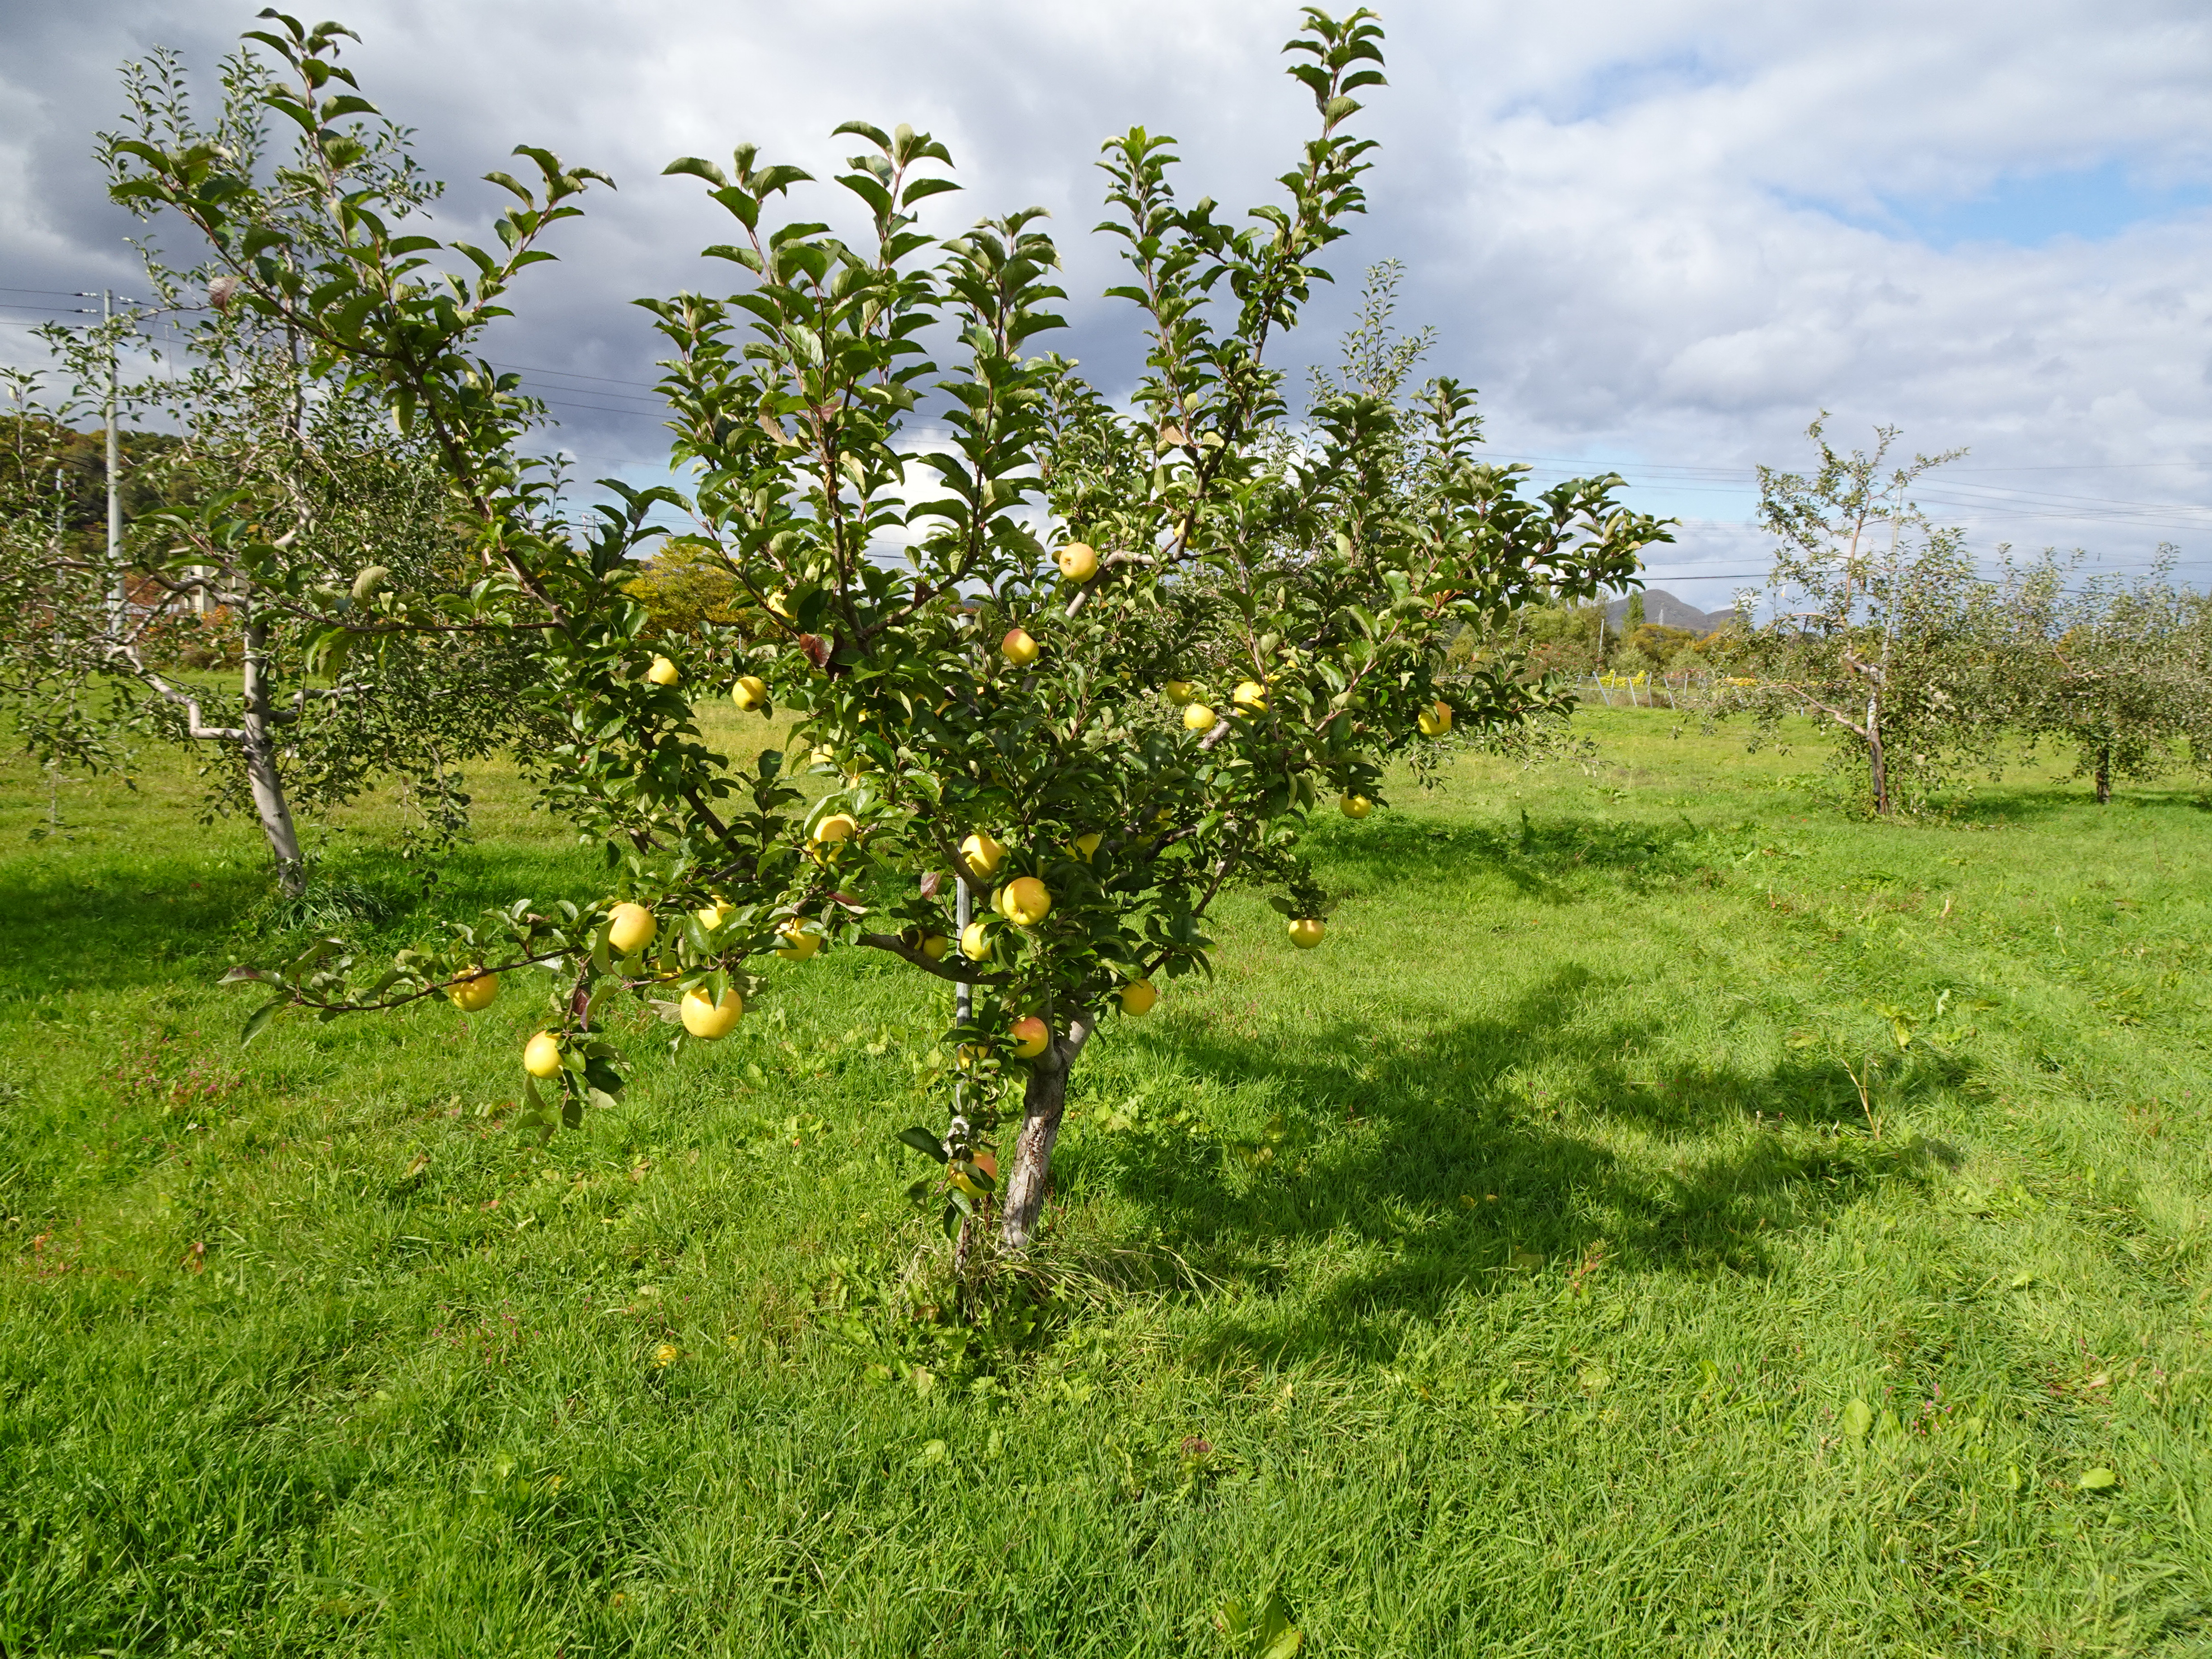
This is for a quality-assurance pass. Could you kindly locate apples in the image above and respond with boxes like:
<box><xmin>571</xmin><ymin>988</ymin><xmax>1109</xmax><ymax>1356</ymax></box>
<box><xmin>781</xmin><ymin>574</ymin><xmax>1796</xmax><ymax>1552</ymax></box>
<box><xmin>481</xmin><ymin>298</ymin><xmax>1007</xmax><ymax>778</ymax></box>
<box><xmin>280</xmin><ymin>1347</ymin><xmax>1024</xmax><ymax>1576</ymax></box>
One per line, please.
<box><xmin>1288</xmin><ymin>919</ymin><xmax>1325</xmax><ymax>949</ymax></box>
<box><xmin>778</xmin><ymin>916</ymin><xmax>821</xmax><ymax>962</ymax></box>
<box><xmin>1166</xmin><ymin>677</ymin><xmax>1195</xmax><ymax>706</ymax></box>
<box><xmin>1418</xmin><ymin>701</ymin><xmax>1451</xmax><ymax>736</ymax></box>
<box><xmin>933</xmin><ymin>699</ymin><xmax>952</xmax><ymax>718</ymax></box>
<box><xmin>948</xmin><ymin>1149</ymin><xmax>997</xmax><ymax>1199</ymax></box>
<box><xmin>1150</xmin><ymin>806</ymin><xmax>1171</xmax><ymax>831</ymax></box>
<box><xmin>608</xmin><ymin>903</ymin><xmax>657</xmax><ymax>955</ymax></box>
<box><xmin>1001</xmin><ymin>628</ymin><xmax>1039</xmax><ymax>666</ymax></box>
<box><xmin>961</xmin><ymin>835</ymin><xmax>1007</xmax><ymax>879</ymax></box>
<box><xmin>1265</xmin><ymin>673</ymin><xmax>1280</xmax><ymax>686</ymax></box>
<box><xmin>1340</xmin><ymin>791</ymin><xmax>1371</xmax><ymax>819</ymax></box>
<box><xmin>957</xmin><ymin>1043</ymin><xmax>991</xmax><ymax>1070</ymax></box>
<box><xmin>805</xmin><ymin>816</ymin><xmax>855</xmax><ymax>867</ymax></box>
<box><xmin>991</xmin><ymin>887</ymin><xmax>1010</xmax><ymax>919</ymax></box>
<box><xmin>448</xmin><ymin>963</ymin><xmax>498</xmax><ymax>1012</ymax></box>
<box><xmin>1174</xmin><ymin>518</ymin><xmax>1202</xmax><ymax>548</ymax></box>
<box><xmin>1234</xmin><ymin>681</ymin><xmax>1269</xmax><ymax>716</ymax></box>
<box><xmin>649</xmin><ymin>658</ymin><xmax>679</xmax><ymax>687</ymax></box>
<box><xmin>1009</xmin><ymin>1016</ymin><xmax>1048</xmax><ymax>1058</ymax></box>
<box><xmin>915</xmin><ymin>693</ymin><xmax>925</xmax><ymax>702</ymax></box>
<box><xmin>849</xmin><ymin>770</ymin><xmax>876</xmax><ymax>789</ymax></box>
<box><xmin>654</xmin><ymin>962</ymin><xmax>685</xmax><ymax>989</ymax></box>
<box><xmin>1066</xmin><ymin>832</ymin><xmax>1102</xmax><ymax>864</ymax></box>
<box><xmin>1283</xmin><ymin>659</ymin><xmax>1297</xmax><ymax>669</ymax></box>
<box><xmin>858</xmin><ymin>709</ymin><xmax>883</xmax><ymax>737</ymax></box>
<box><xmin>1059</xmin><ymin>542</ymin><xmax>1098</xmax><ymax>583</ymax></box>
<box><xmin>914</xmin><ymin>930</ymin><xmax>948</xmax><ymax>961</ymax></box>
<box><xmin>767</xmin><ymin>592</ymin><xmax>794</xmax><ymax>626</ymax></box>
<box><xmin>1088</xmin><ymin>602</ymin><xmax>1109</xmax><ymax>609</ymax></box>
<box><xmin>1120</xmin><ymin>979</ymin><xmax>1156</xmax><ymax>1016</ymax></box>
<box><xmin>1184</xmin><ymin>703</ymin><xmax>1216</xmax><ymax>736</ymax></box>
<box><xmin>647</xmin><ymin>651</ymin><xmax>662</xmax><ymax>660</ymax></box>
<box><xmin>990</xmin><ymin>753</ymin><xmax>1011</xmax><ymax>789</ymax></box>
<box><xmin>1096</xmin><ymin>588</ymin><xmax>1102</xmax><ymax>597</ymax></box>
<box><xmin>1134</xmin><ymin>834</ymin><xmax>1156</xmax><ymax>846</ymax></box>
<box><xmin>524</xmin><ymin>1030</ymin><xmax>563</xmax><ymax>1079</ymax></box>
<box><xmin>1002</xmin><ymin>877</ymin><xmax>1051</xmax><ymax>925</ymax></box>
<box><xmin>810</xmin><ymin>744</ymin><xmax>834</xmax><ymax>764</ymax></box>
<box><xmin>1117</xmin><ymin>661</ymin><xmax>1130</xmax><ymax>680</ymax></box>
<box><xmin>961</xmin><ymin>922</ymin><xmax>993</xmax><ymax>961</ymax></box>
<box><xmin>699</xmin><ymin>895</ymin><xmax>737</xmax><ymax>930</ymax></box>
<box><xmin>732</xmin><ymin>676</ymin><xmax>767</xmax><ymax>711</ymax></box>
<box><xmin>680</xmin><ymin>986</ymin><xmax>742</xmax><ymax>1041</ymax></box>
